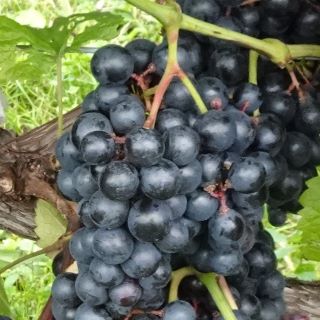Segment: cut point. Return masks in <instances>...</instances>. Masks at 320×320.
Instances as JSON below:
<instances>
[{"instance_id":"2","label":"cut point","mask_w":320,"mask_h":320,"mask_svg":"<svg viewBox=\"0 0 320 320\" xmlns=\"http://www.w3.org/2000/svg\"><path fill=\"white\" fill-rule=\"evenodd\" d=\"M260 53L251 50L249 53L248 83L257 85V57Z\"/></svg>"},{"instance_id":"1","label":"cut point","mask_w":320,"mask_h":320,"mask_svg":"<svg viewBox=\"0 0 320 320\" xmlns=\"http://www.w3.org/2000/svg\"><path fill=\"white\" fill-rule=\"evenodd\" d=\"M165 29L167 34L169 52L165 72L159 82V85H155L150 89H145L140 96V99L142 100L143 97H148L152 94L155 95L152 102L150 114L142 127L144 129H154L157 111L161 105L169 83L174 76H177V78L181 80V82L187 88L194 101L198 114L201 115L208 112V109L199 93L177 63V36L179 28L175 26H165Z\"/></svg>"}]
</instances>
